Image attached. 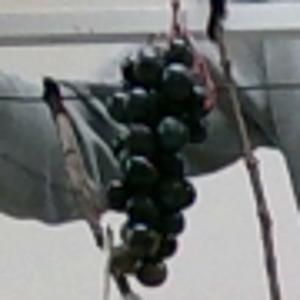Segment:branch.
Wrapping results in <instances>:
<instances>
[{"label": "branch", "instance_id": "30e6481e", "mask_svg": "<svg viewBox=\"0 0 300 300\" xmlns=\"http://www.w3.org/2000/svg\"><path fill=\"white\" fill-rule=\"evenodd\" d=\"M208 15L205 36L215 53L217 66L223 78L224 90L231 110L232 120L237 132L239 150L244 168L249 177L251 194L255 201V213L259 220V239L262 245L264 266L268 280L269 300H283L277 271V256L274 248V221L269 210L261 178V165L255 156L254 148L243 119L239 88L236 87L231 59L225 45V26L229 18L228 0H206Z\"/></svg>", "mask_w": 300, "mask_h": 300}, {"label": "branch", "instance_id": "325d2c04", "mask_svg": "<svg viewBox=\"0 0 300 300\" xmlns=\"http://www.w3.org/2000/svg\"><path fill=\"white\" fill-rule=\"evenodd\" d=\"M41 97L43 103L49 109V117L63 155L64 167L71 191L85 218V223L93 236L96 247L100 249L106 260L108 274L112 277L117 292L122 300H145L139 293L133 290L128 276L117 275L111 269L108 254L112 247L104 229L101 216L94 205L89 186L87 185L79 145L63 102L61 86L50 75L44 74L42 76Z\"/></svg>", "mask_w": 300, "mask_h": 300}]
</instances>
